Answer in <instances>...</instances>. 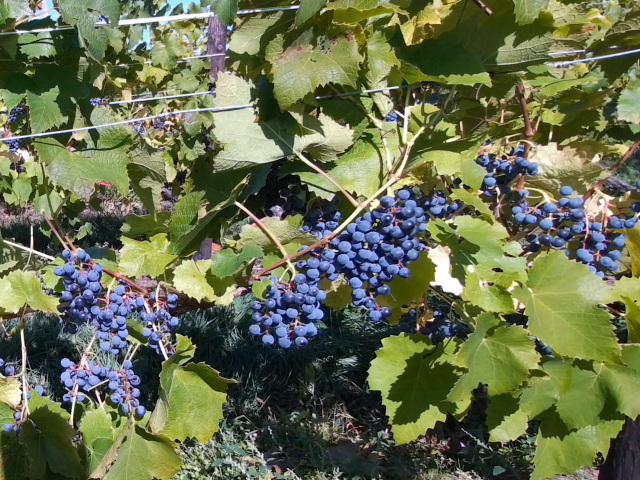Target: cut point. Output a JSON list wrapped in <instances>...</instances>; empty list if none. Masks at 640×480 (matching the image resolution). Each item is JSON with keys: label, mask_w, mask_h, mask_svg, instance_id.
Wrapping results in <instances>:
<instances>
[{"label": "cut point", "mask_w": 640, "mask_h": 480, "mask_svg": "<svg viewBox=\"0 0 640 480\" xmlns=\"http://www.w3.org/2000/svg\"><path fill=\"white\" fill-rule=\"evenodd\" d=\"M523 190L537 191V192L541 193V196H543L544 198L548 197V194L545 191H543L542 189H539V188L524 186Z\"/></svg>", "instance_id": "obj_2"}, {"label": "cut point", "mask_w": 640, "mask_h": 480, "mask_svg": "<svg viewBox=\"0 0 640 480\" xmlns=\"http://www.w3.org/2000/svg\"><path fill=\"white\" fill-rule=\"evenodd\" d=\"M598 195H601V197L604 198V204H608L610 200L613 199V196H608L604 194L601 190L596 189L594 195L591 197L590 203H594V200Z\"/></svg>", "instance_id": "obj_1"}, {"label": "cut point", "mask_w": 640, "mask_h": 480, "mask_svg": "<svg viewBox=\"0 0 640 480\" xmlns=\"http://www.w3.org/2000/svg\"><path fill=\"white\" fill-rule=\"evenodd\" d=\"M286 265H288V266L285 267L284 273H287L288 270L291 268L293 276H296V271H295L294 265L291 262H289V260L286 261Z\"/></svg>", "instance_id": "obj_3"}, {"label": "cut point", "mask_w": 640, "mask_h": 480, "mask_svg": "<svg viewBox=\"0 0 640 480\" xmlns=\"http://www.w3.org/2000/svg\"><path fill=\"white\" fill-rule=\"evenodd\" d=\"M117 279H118V278L113 277V278L110 280V282H109V284H108V287H107V295H110V289H111V287H112V284H113V283L115 282V280H117Z\"/></svg>", "instance_id": "obj_4"}]
</instances>
